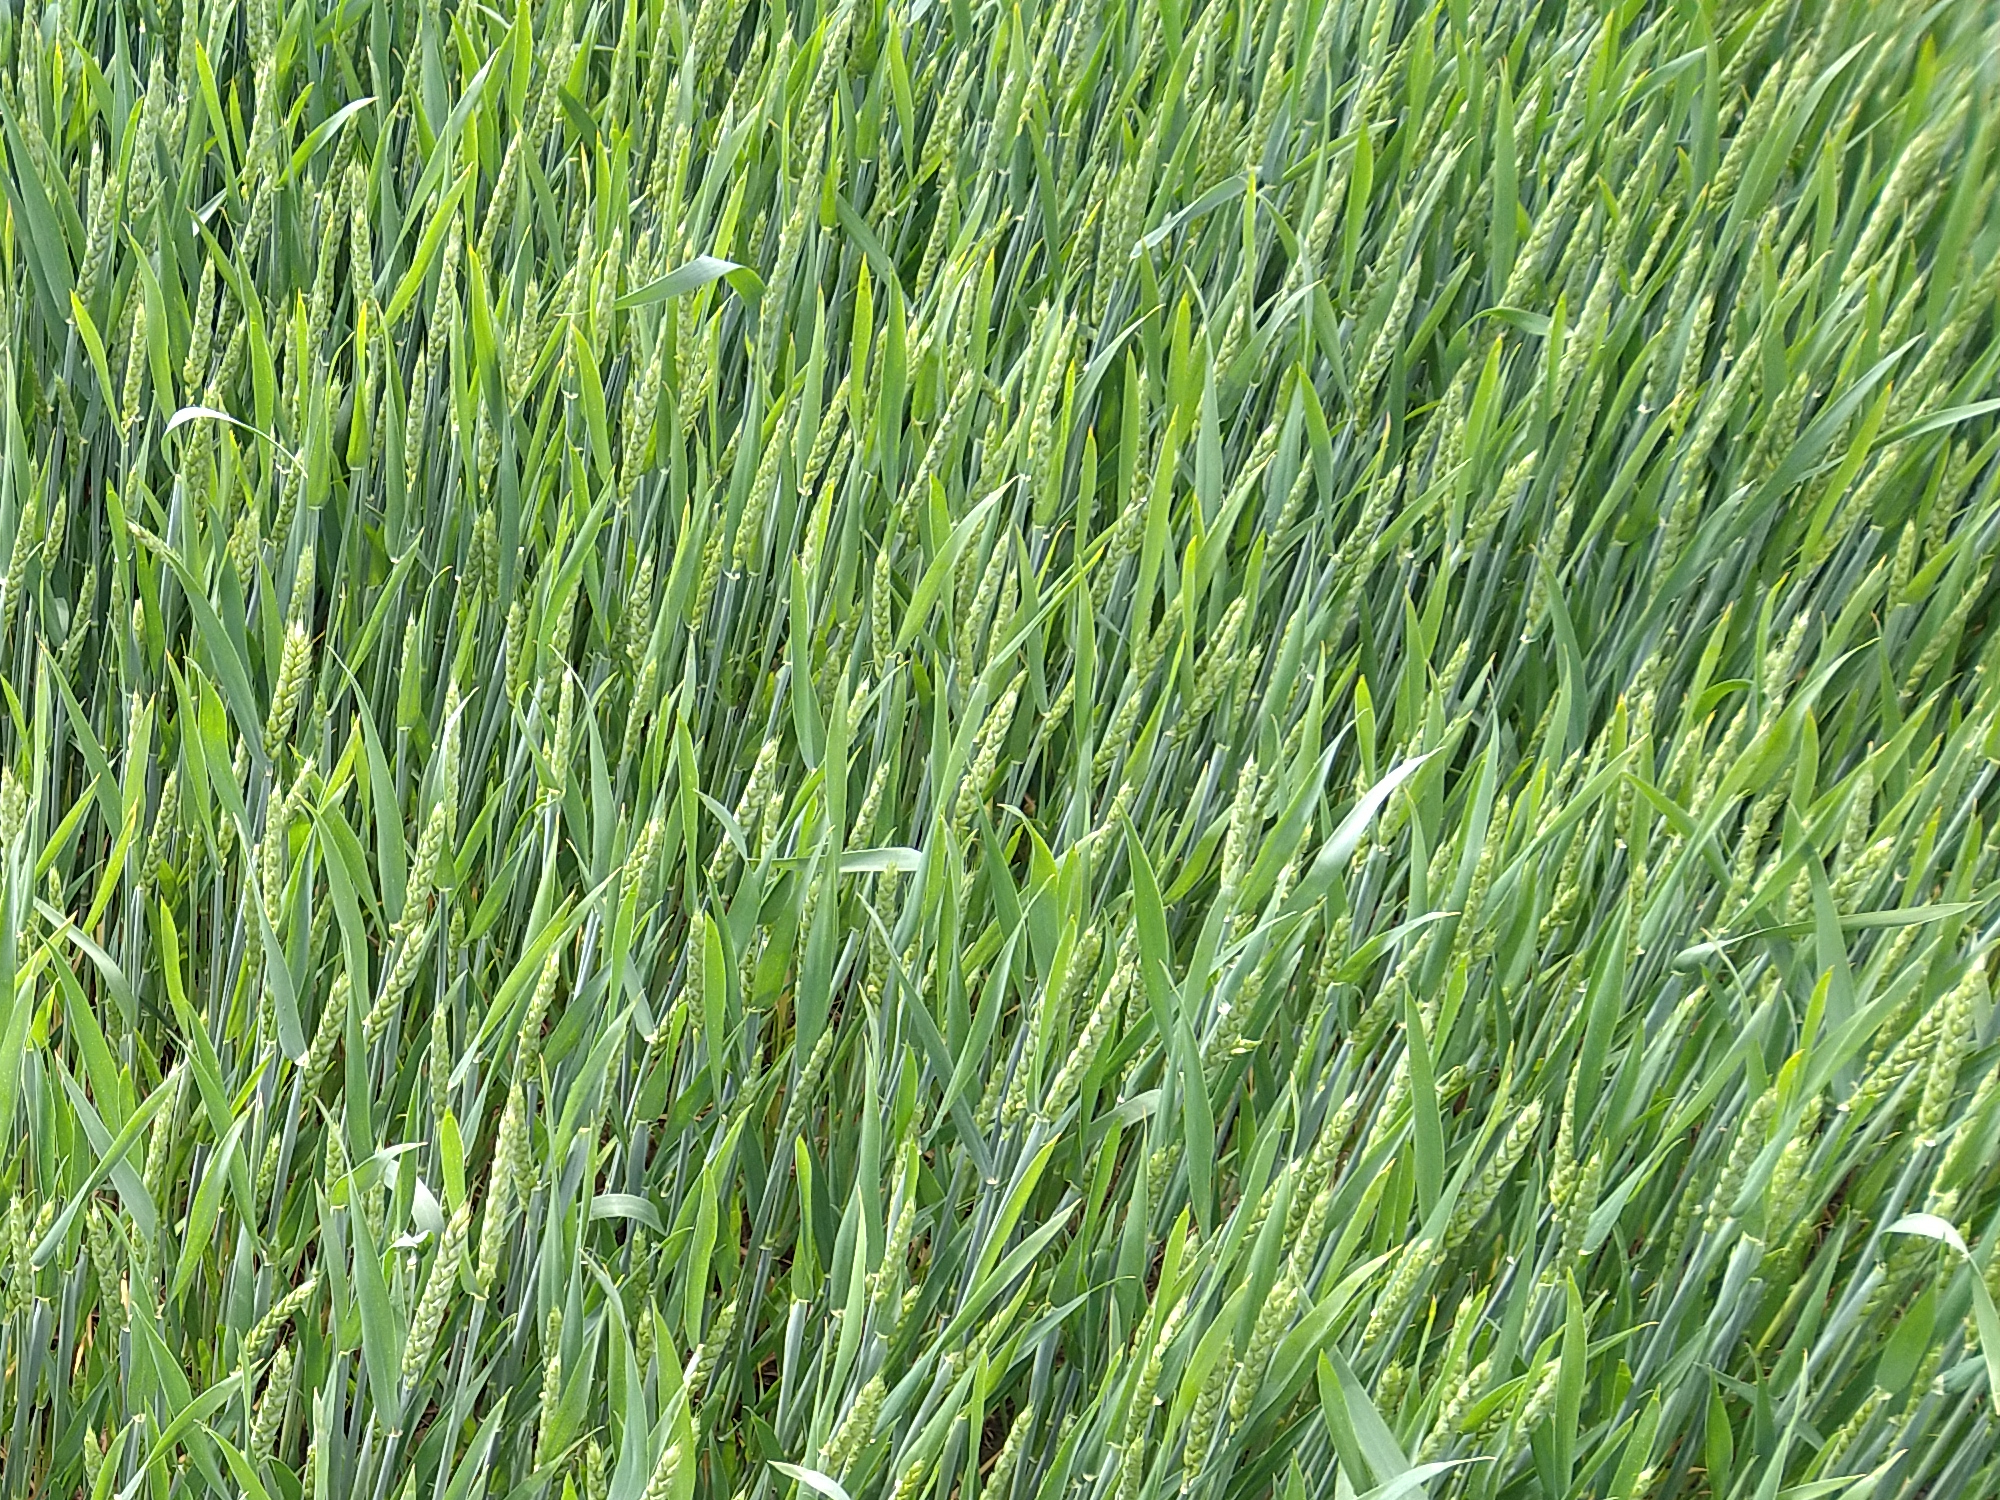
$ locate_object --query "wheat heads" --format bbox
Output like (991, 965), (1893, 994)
(1775, 2), (1838, 123)
(789, 18), (852, 147)
(1187, 100), (1244, 251)
(1904, 1346), (1945, 1435)
(706, 742), (779, 881)
(766, 28), (792, 115)
(261, 989), (275, 1041)
(1026, 13), (1043, 64)
(1929, 1068), (2000, 1195)
(2, 767), (23, 857)
(985, 417), (996, 470)
(257, 0), (277, 47)
(929, 49), (969, 160)
(320, 113), (361, 239)
(894, 1285), (921, 1343)
(212, 281), (240, 349)
(535, 269), (574, 354)
(1674, 307), (1711, 430)
(680, 344), (718, 443)
(953, 268), (980, 365)
(1564, 0), (1584, 46)
(127, 1196), (158, 1315)
(869, 866), (897, 1008)
(1701, 61), (1778, 212)
(1277, 1097), (1360, 1249)
(323, 1127), (345, 1194)
(1132, 368), (1150, 503)
(1574, 1476), (1653, 1500)
(328, 19), (359, 95)
(1929, 104), (1970, 164)
(1271, 450), (1314, 552)
(1838, 131), (1935, 288)
(241, 57), (277, 189)
(689, 910), (705, 1037)
(507, 1084), (535, 1200)
(551, 674), (572, 784)
(81, 1427), (113, 1500)
(1023, 3), (1062, 115)
(1895, 570), (1984, 711)
(1538, 749), (1579, 827)
(482, 506), (496, 601)
(466, 1002), (478, 1052)
(623, 382), (640, 449)
(634, 1306), (656, 1383)
(677, 254), (693, 370)
(448, 138), (468, 182)
(1629, 863), (1647, 968)
(1454, 796), (1509, 962)
(507, 598), (525, 698)
(1518, 1361), (1562, 1455)
(1555, 1051), (1583, 1202)
(512, 280), (537, 391)
(476, 379), (498, 495)
(279, 756), (312, 823)
(1043, 670), (1078, 744)
(1120, 918), (1142, 971)
(1443, 418), (1466, 516)
(1832, 37), (1895, 136)
(364, 364), (376, 425)
(365, 926), (428, 1056)
(58, 0), (74, 78)
(431, 1008), (446, 1126)
(1623, 127), (1666, 207)
(1702, 1092), (1779, 1244)
(876, 550), (891, 687)
(1182, 1340), (1232, 1486)
(1542, 25), (1608, 169)
(1190, 0), (1226, 106)
(189, 823), (202, 882)
(260, 628), (312, 754)
(915, 181), (957, 309)
(3, 1202), (61, 1324)
(1362, 13), (1424, 117)
(219, 457), (249, 532)
(1543, 371), (1598, 516)
(447, 908), (464, 987)
(1455, 98), (1542, 238)
(131, 56), (163, 214)
(848, 769), (891, 854)
(968, 1308), (1004, 1359)
(1623, 206), (1676, 295)
(524, 41), (550, 137)
(875, 135), (888, 213)
(625, 663), (657, 760)
(1660, 778), (1714, 874)
(1093, 88), (1123, 148)
(84, 1210), (129, 1347)
(398, 113), (420, 205)
(1289, 1188), (1342, 1289)
(1107, 1435), (1146, 1500)
(1576, 227), (1603, 275)
(1060, 112), (1080, 205)
(272, 296), (289, 363)
(1781, 868), (1813, 938)
(13, 904), (41, 968)
(299, 1447), (317, 1500)
(1217, 760), (1255, 884)
(759, 213), (804, 376)
(1465, 461), (1531, 550)
(617, 359), (664, 500)
(1123, 959), (1145, 1038)
(402, 612), (414, 665)
(627, 263), (644, 380)
(1711, 0), (1789, 109)
(299, 183), (316, 260)
(1140, 28), (1170, 86)
(126, 692), (142, 775)
(531, 1360), (561, 1471)
(1371, 1369), (1402, 1431)
(350, 166), (372, 309)
(975, 1413), (1029, 1500)
(1545, 275), (1611, 417)
(0, 290), (3, 407)
(277, 327), (296, 466)
(54, 378), (81, 471)
(45, 863), (67, 955)
(1069, 166), (1109, 275)
(206, 0), (229, 61)
(1518, 1267), (1553, 1341)
(882, 1464), (930, 1500)
(443, 682), (459, 851)
(296, 974), (353, 1118)
(1445, 1103), (1541, 1247)
(738, 930), (756, 1003)
(692, 538), (724, 629)
(517, 946), (561, 1083)
(1086, 784), (1134, 878)
(1146, 1141), (1182, 1219)
(683, 0), (719, 86)
(729, 31), (768, 117)
(33, 364), (48, 438)
(1665, 725), (1701, 803)
(531, 45), (568, 157)
(1922, 441), (1972, 558)
(803, 375), (851, 498)
(1092, 165), (1133, 326)
(1519, 693), (1557, 775)
(791, 1029), (832, 1125)
(1249, 714), (1308, 857)
(250, 1139), (282, 1224)
(694, 509), (724, 576)
(1416, 844), (1451, 908)
(296, 47), (306, 88)
(1333, 468), (1403, 592)
(792, 878), (822, 1009)
(752, 207), (762, 266)
(70, 164), (79, 210)
(1479, 0), (1518, 66)
(845, 682), (869, 725)
(915, 55), (945, 106)
(18, 0), (40, 129)
(1023, 309), (1049, 416)
(265, 786), (282, 927)
(248, 1348), (292, 1458)
(1743, 376), (1809, 486)
(573, 227), (594, 331)
(1355, 931), (1434, 1043)
(625, 1230), (647, 1314)
(310, 896), (334, 955)
(539, 560), (583, 712)
(1714, 796), (1783, 928)
(41, 495), (66, 582)
(844, 598), (863, 667)
(4, 502), (36, 627)
(1267, 611), (1298, 701)
(118, 304), (147, 414)
(594, 230), (623, 363)
(422, 231), (463, 368)
(1879, 286), (1916, 357)
(140, 773), (179, 889)
(458, 516), (480, 597)
(800, 477), (834, 588)
(87, 140), (102, 228)
(811, 1377), (887, 1500)
(1240, 1162), (1299, 1243)
(595, 1421), (701, 1500)
(607, 22), (633, 128)
(904, 321), (918, 358)
(829, 430), (853, 488)
(970, 1061), (1009, 1124)
(1195, 593), (1249, 678)
(222, 516), (258, 600)
(102, 265), (142, 395)
(816, 652), (835, 720)
(1870, 995), (1922, 1077)
(1049, 967), (1134, 1117)
(1372, 100), (1391, 153)
(1002, 1003), (1045, 1119)
(1771, 242), (1808, 310)
(1788, 1091), (1824, 1145)
(1196, 971), (1262, 1101)
(131, 594), (145, 654)
(1641, 242), (1701, 411)
(1826, 840), (1893, 914)
(1139, 594), (1184, 690)
(1214, 199), (1237, 263)
(1940, 232), (2000, 386)
(1360, 1237), (1430, 1346)
(0, 0), (12, 132)
(1283, 178), (1346, 305)
(400, 1215), (466, 1399)
(441, 0), (468, 78)
(1650, 485), (1701, 594)
(312, 293), (328, 390)
(734, 394), (801, 574)
(1433, 20), (1453, 64)
(1419, 1359), (1497, 1449)
(1720, 213), (1779, 358)
(249, 0), (262, 58)
(1913, 1009), (1966, 1147)
(1135, 0), (1156, 48)
(251, 69), (277, 171)
(978, 72), (1019, 187)
(1192, 115), (1208, 169)
(879, 1199), (914, 1296)
(1303, 918), (1355, 1065)
(1120, 141), (1156, 292)
(584, 1441), (607, 1500)
(1413, 377), (1467, 471)
(479, 137), (521, 276)
(68, 568), (98, 681)
(1931, 1242), (1960, 1285)
(165, 110), (185, 157)
(1425, 387), (1461, 515)
(235, 175), (276, 272)
(991, 568), (1021, 641)
(953, 440), (1015, 567)
(1887, 517), (1918, 625)
(958, 675), (1027, 818)
(1905, 151), (1970, 242)
(663, 126), (685, 228)
(1838, 768), (1877, 880)
(158, 102), (175, 146)
(1092, 499), (1149, 623)
(1250, 0), (1273, 39)
(1525, 503), (1572, 634)
(1787, 410), (1855, 512)
(1249, 0), (1299, 160)
(9, 1195), (35, 1312)
(1876, 322), (1958, 436)
(218, 730), (249, 850)
(165, 0), (182, 80)
(629, 550), (653, 678)
(186, 391), (218, 520)
(559, 1), (572, 46)
(1871, 1203), (1955, 1319)
(371, 390), (386, 464)
(1363, 0), (1396, 88)
(1242, 428), (1279, 492)
(698, 1), (748, 95)
(637, 1009), (674, 1095)
(1359, 265), (1421, 402)
(678, 1303), (732, 1399)
(17, 115), (43, 183)
(1678, 340), (1756, 494)
(143, 1088), (175, 1210)
(1521, 30), (1550, 90)
(633, 235), (650, 322)
(1521, 345), (1551, 441)
(311, 692), (328, 760)
(1764, 1139), (1806, 1229)
(1298, 0), (1344, 109)
(1771, 617), (1808, 721)
(1445, 1295), (1473, 1404)
(1027, 315), (1081, 487)
(316, 167), (359, 305)
(1234, 643), (1266, 714)
(328, 380), (343, 438)
(867, 329), (888, 414)
(619, 822), (665, 910)
(1609, 690), (1653, 838)
(1545, 201), (1591, 291)
(1801, 450), (1893, 576)
(1328, 550), (1369, 640)
(178, 0), (197, 91)
(245, 1274), (319, 1367)
(1539, 821), (1585, 934)
(399, 28), (424, 123)
(651, 73), (680, 226)
(1661, 1171), (1701, 1283)
(1363, 1061), (1420, 1159)
(1556, 1158), (1602, 1278)
(365, 1181), (385, 1244)
(1351, 767), (1369, 873)
(1349, 203), (1419, 327)
(1397, 68), (1459, 181)
(1824, 1389), (1883, 1479)
(959, 631), (975, 720)
(76, 181), (120, 310)
(212, 318), (250, 402)
(181, 258), (213, 381)
(1598, 657), (1659, 781)
(1168, 654), (1238, 729)
(480, 1113), (510, 1281)
(241, 875), (260, 970)
(405, 353), (432, 483)
(958, 537), (993, 643)
(1193, 275), (1249, 435)
(1062, 0), (1104, 84)
(1513, 163), (1585, 292)
(899, 376), (976, 537)
(286, 545), (315, 630)
(1383, 637), (1469, 840)
(1093, 695), (1138, 785)
(1234, 1285), (1303, 1417)
(903, 329), (935, 394)
(1859, 991), (1982, 1103)
(417, 190), (439, 253)
(880, 64), (892, 121)
(1050, 931), (1102, 1031)
(542, 1307), (561, 1371)
(1120, 1295), (1191, 1442)
(262, 449), (315, 565)
(1605, 219), (1633, 280)
(933, 110), (971, 188)
(1958, 1254), (2000, 1344)
(1471, 260), (1530, 356)
(1877, 918), (1923, 991)
(797, 127), (824, 244)
(1702, 654), (1778, 804)
(1277, 363), (1297, 424)
(641, 3), (669, 105)
(1274, 865), (1301, 928)
(1151, 211), (1172, 277)
(394, 801), (444, 961)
